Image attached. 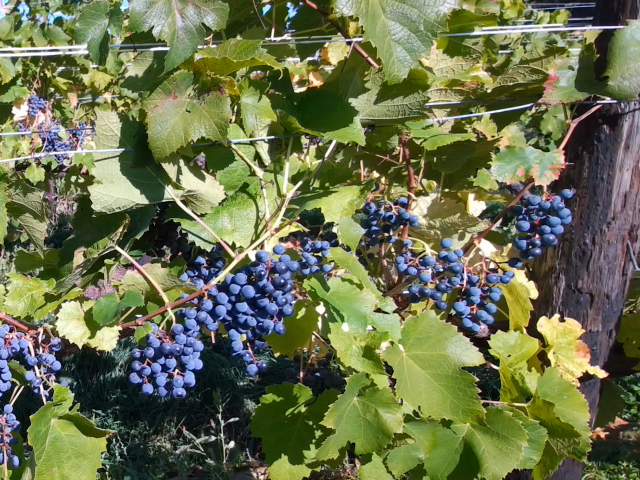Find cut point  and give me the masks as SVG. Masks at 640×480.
I'll use <instances>...</instances> for the list:
<instances>
[{
    "label": "cut point",
    "instance_id": "6a23745f",
    "mask_svg": "<svg viewBox=\"0 0 640 480\" xmlns=\"http://www.w3.org/2000/svg\"><path fill=\"white\" fill-rule=\"evenodd\" d=\"M408 239H409V240L419 241V242H421V243L423 244V246H424V248H425V250H426V251H429V250H430V245H429V243H428V242H427L423 237H421V236H417V235H411V234H410V237H409Z\"/></svg>",
    "mask_w": 640,
    "mask_h": 480
},
{
    "label": "cut point",
    "instance_id": "7d7e1d6f",
    "mask_svg": "<svg viewBox=\"0 0 640 480\" xmlns=\"http://www.w3.org/2000/svg\"><path fill=\"white\" fill-rule=\"evenodd\" d=\"M477 251H478L480 254H483V253H484V250H483V248L481 247V245H480L479 241H478V242H476V243H474V246H473V248H472V249H471V251H470V255H471V256H474V255L476 254V252H477Z\"/></svg>",
    "mask_w": 640,
    "mask_h": 480
}]
</instances>
